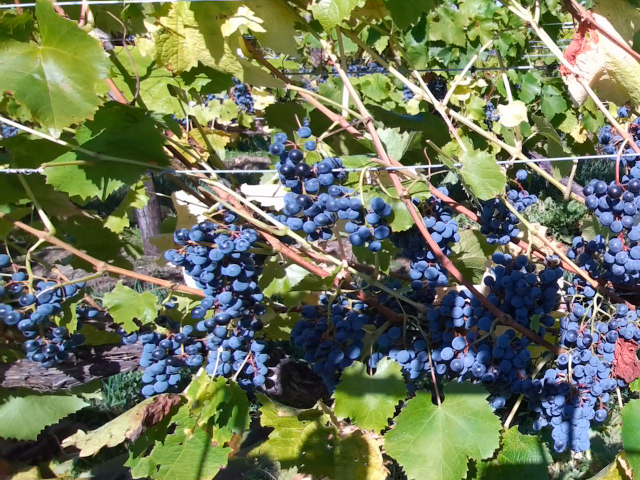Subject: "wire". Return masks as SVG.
<instances>
[{
    "label": "wire",
    "instance_id": "d2f4af69",
    "mask_svg": "<svg viewBox=\"0 0 640 480\" xmlns=\"http://www.w3.org/2000/svg\"><path fill=\"white\" fill-rule=\"evenodd\" d=\"M148 175H187V174H212V175H226V174H235V175H243V174H261V175H276V170H264V169H223V170H215V169H184V170H174L173 172H164V171H156V170H147Z\"/></svg>",
    "mask_w": 640,
    "mask_h": 480
},
{
    "label": "wire",
    "instance_id": "4f2155b8",
    "mask_svg": "<svg viewBox=\"0 0 640 480\" xmlns=\"http://www.w3.org/2000/svg\"><path fill=\"white\" fill-rule=\"evenodd\" d=\"M421 168H442L447 169L445 163H419V164H403L402 166H383V167H345L332 168V173H348V172H385V171H404L406 169Z\"/></svg>",
    "mask_w": 640,
    "mask_h": 480
},
{
    "label": "wire",
    "instance_id": "a73af890",
    "mask_svg": "<svg viewBox=\"0 0 640 480\" xmlns=\"http://www.w3.org/2000/svg\"><path fill=\"white\" fill-rule=\"evenodd\" d=\"M618 154H605V155H588V156H557V157H543V158H528L521 159H506L497 160V165H509V164H530V163H545V162H560V161H591V160H608L617 158Z\"/></svg>",
    "mask_w": 640,
    "mask_h": 480
}]
</instances>
